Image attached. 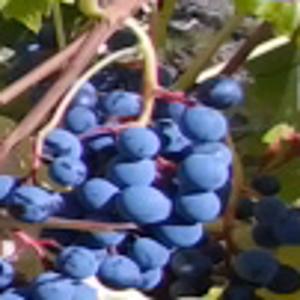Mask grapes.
Wrapping results in <instances>:
<instances>
[{"label":"grapes","instance_id":"b958b902","mask_svg":"<svg viewBox=\"0 0 300 300\" xmlns=\"http://www.w3.org/2000/svg\"><path fill=\"white\" fill-rule=\"evenodd\" d=\"M249 188L259 199H241L235 210L238 222L256 217L253 239L260 247L242 249L234 259L235 276L225 291V300H255V292L267 287L276 295L300 291V271L281 265L271 251L285 245L300 247V206L288 208L280 198L281 183L271 173L255 176Z\"/></svg>","mask_w":300,"mask_h":300},{"label":"grapes","instance_id":"01657485","mask_svg":"<svg viewBox=\"0 0 300 300\" xmlns=\"http://www.w3.org/2000/svg\"><path fill=\"white\" fill-rule=\"evenodd\" d=\"M197 101L154 108L131 90L104 97L81 84L66 126L40 142L48 181L0 174V207L25 225L45 223L61 248L54 270L14 286L17 270L0 259V300H100L133 288L173 297L208 294L225 246L206 232L228 210L232 147L223 113L246 98L242 83L219 75L198 83ZM92 278L95 285L86 281Z\"/></svg>","mask_w":300,"mask_h":300}]
</instances>
